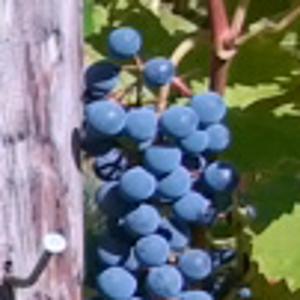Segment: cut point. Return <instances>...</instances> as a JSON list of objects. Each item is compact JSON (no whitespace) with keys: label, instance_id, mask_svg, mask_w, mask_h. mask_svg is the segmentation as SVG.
Masks as SVG:
<instances>
[{"label":"cut point","instance_id":"obj_2","mask_svg":"<svg viewBox=\"0 0 300 300\" xmlns=\"http://www.w3.org/2000/svg\"><path fill=\"white\" fill-rule=\"evenodd\" d=\"M172 95V90L169 87L161 86L158 89L155 100V110L158 113H163L166 110L167 100Z\"/></svg>","mask_w":300,"mask_h":300},{"label":"cut point","instance_id":"obj_1","mask_svg":"<svg viewBox=\"0 0 300 300\" xmlns=\"http://www.w3.org/2000/svg\"><path fill=\"white\" fill-rule=\"evenodd\" d=\"M208 30H200L187 36L180 45H178L171 54V60L174 63H179L183 57L198 43L208 41Z\"/></svg>","mask_w":300,"mask_h":300}]
</instances>
